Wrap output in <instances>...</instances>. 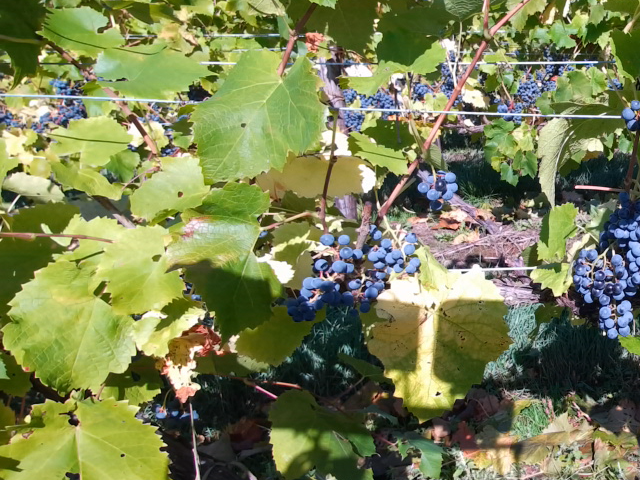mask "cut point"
I'll use <instances>...</instances> for the list:
<instances>
[{"label":"cut point","instance_id":"6a23745f","mask_svg":"<svg viewBox=\"0 0 640 480\" xmlns=\"http://www.w3.org/2000/svg\"><path fill=\"white\" fill-rule=\"evenodd\" d=\"M382 221L384 222V224H385V226H386L387 230H388V231H391V230H392V225H391V223L389 222V220H388V218H387V213H385V214L382 216Z\"/></svg>","mask_w":640,"mask_h":480}]
</instances>
